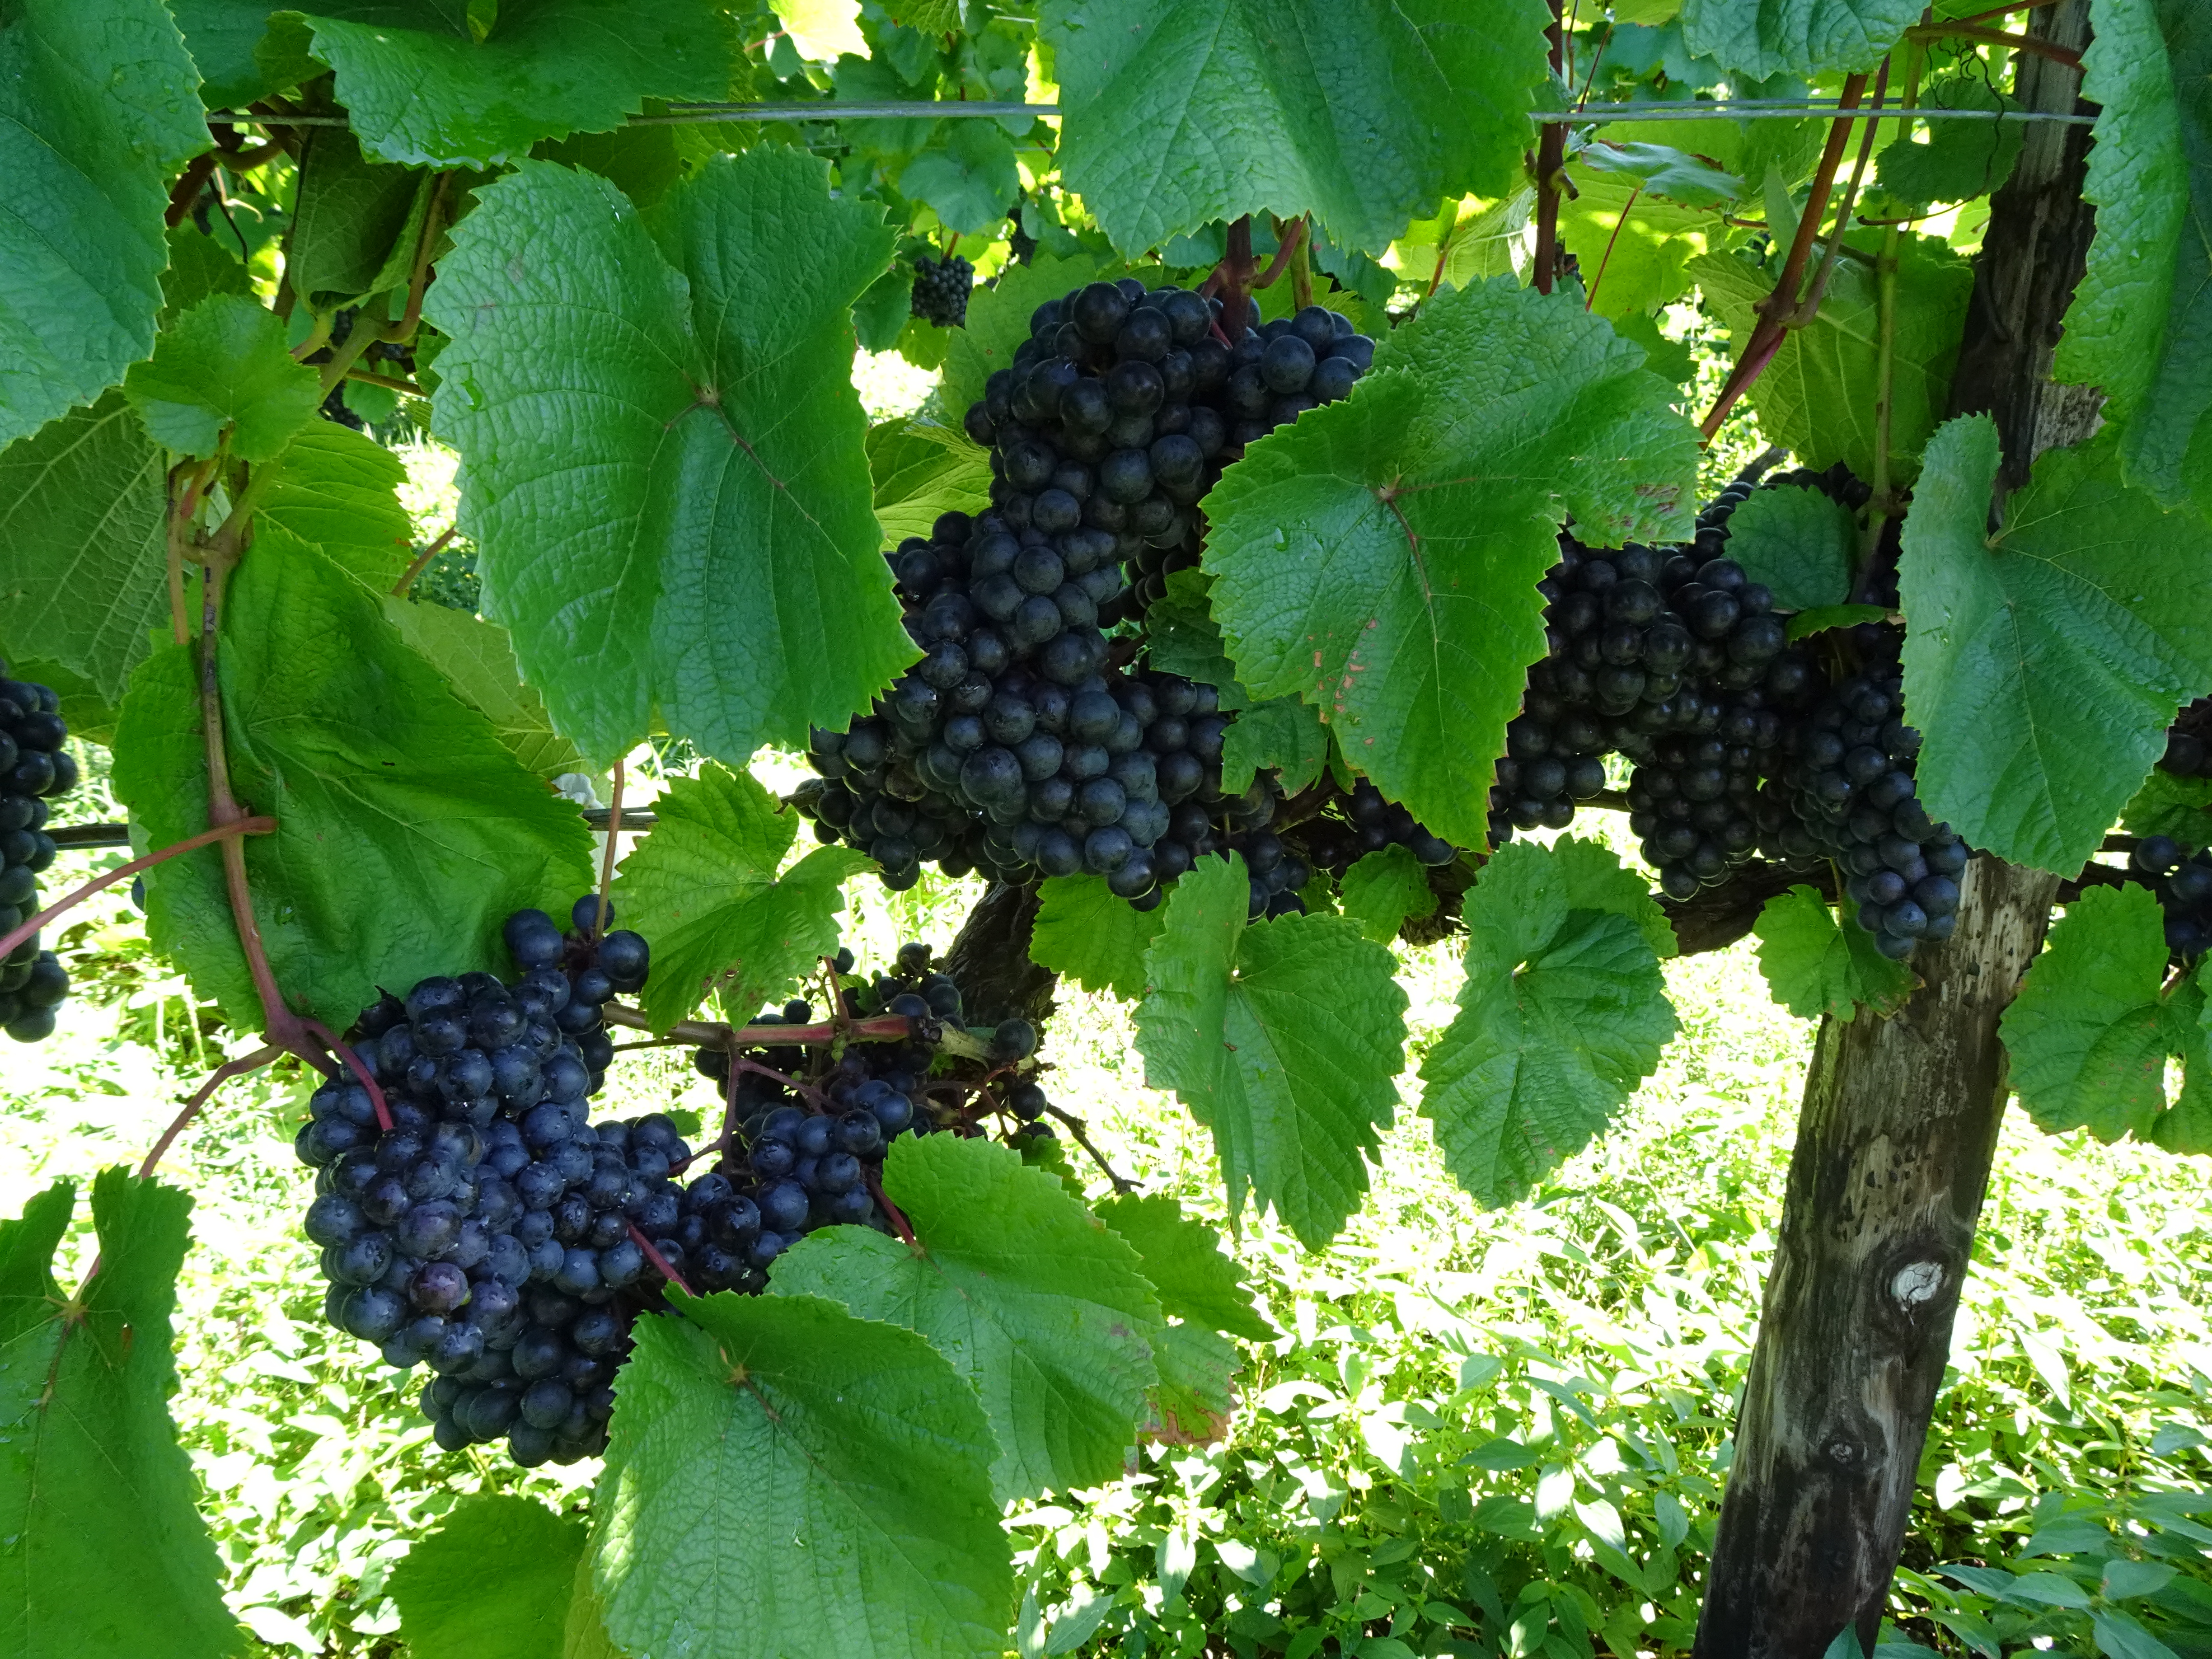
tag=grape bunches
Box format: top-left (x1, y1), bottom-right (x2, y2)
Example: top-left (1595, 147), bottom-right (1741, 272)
top-left (966, 279), bottom-right (1259, 552)
top-left (503, 895), bottom-right (651, 1097)
top-left (1757, 717), bottom-right (1817, 873)
top-left (421, 1277), bottom-right (620, 1467)
top-left (1485, 512), bottom-right (1693, 848)
top-left (841, 943), bottom-right (965, 1091)
top-left (1111, 650), bottom-right (1235, 911)
top-left (797, 947), bottom-right (854, 980)
top-left (1625, 639), bottom-right (1785, 905)
top-left (696, 1000), bottom-right (812, 1192)
top-left (1304, 776), bottom-right (1461, 882)
top-left (1157, 770), bottom-right (1311, 922)
top-left (550, 1112), bottom-right (698, 1357)
top-left (910, 251), bottom-right (974, 331)
top-left (1099, 529), bottom-right (1215, 666)
top-left (1233, 308), bottom-right (1375, 455)
top-left (2110, 835), bottom-right (2212, 969)
top-left (1784, 661), bottom-right (1986, 958)
top-left (742, 1103), bottom-right (892, 1273)
top-left (968, 1019), bottom-right (1055, 1153)
top-left (805, 489), bottom-right (1171, 897)
top-left (648, 1172), bottom-right (769, 1298)
top-left (295, 972), bottom-right (589, 1368)
top-left (791, 780), bottom-right (977, 891)
top-left (131, 877), bottom-right (145, 912)
top-left (882, 510), bottom-right (975, 601)
top-left (2154, 695), bottom-right (2211, 778)
top-left (0, 659), bottom-right (77, 1042)
top-left (1667, 470), bottom-right (1887, 696)
top-left (828, 1050), bottom-right (917, 1160)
